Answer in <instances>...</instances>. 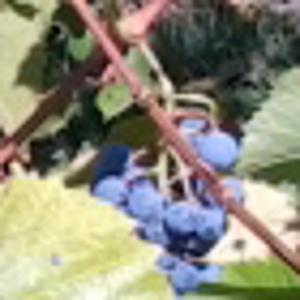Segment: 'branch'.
I'll use <instances>...</instances> for the list:
<instances>
[{
	"mask_svg": "<svg viewBox=\"0 0 300 300\" xmlns=\"http://www.w3.org/2000/svg\"><path fill=\"white\" fill-rule=\"evenodd\" d=\"M164 3L165 0H147L107 34L84 0H68V10L75 13L82 28L95 43L58 84L40 96L17 130L1 144L0 165L9 162L13 154L32 136L52 106L61 102L107 55L120 69L121 81L133 100L163 139L180 153L196 175L207 183L218 201L241 221L266 250L300 274V255L268 230L253 211L229 190L193 145L174 128L152 91L143 83L135 64L123 50L136 49L139 41L148 40L154 26L152 18Z\"/></svg>",
	"mask_w": 300,
	"mask_h": 300,
	"instance_id": "obj_1",
	"label": "branch"
}]
</instances>
